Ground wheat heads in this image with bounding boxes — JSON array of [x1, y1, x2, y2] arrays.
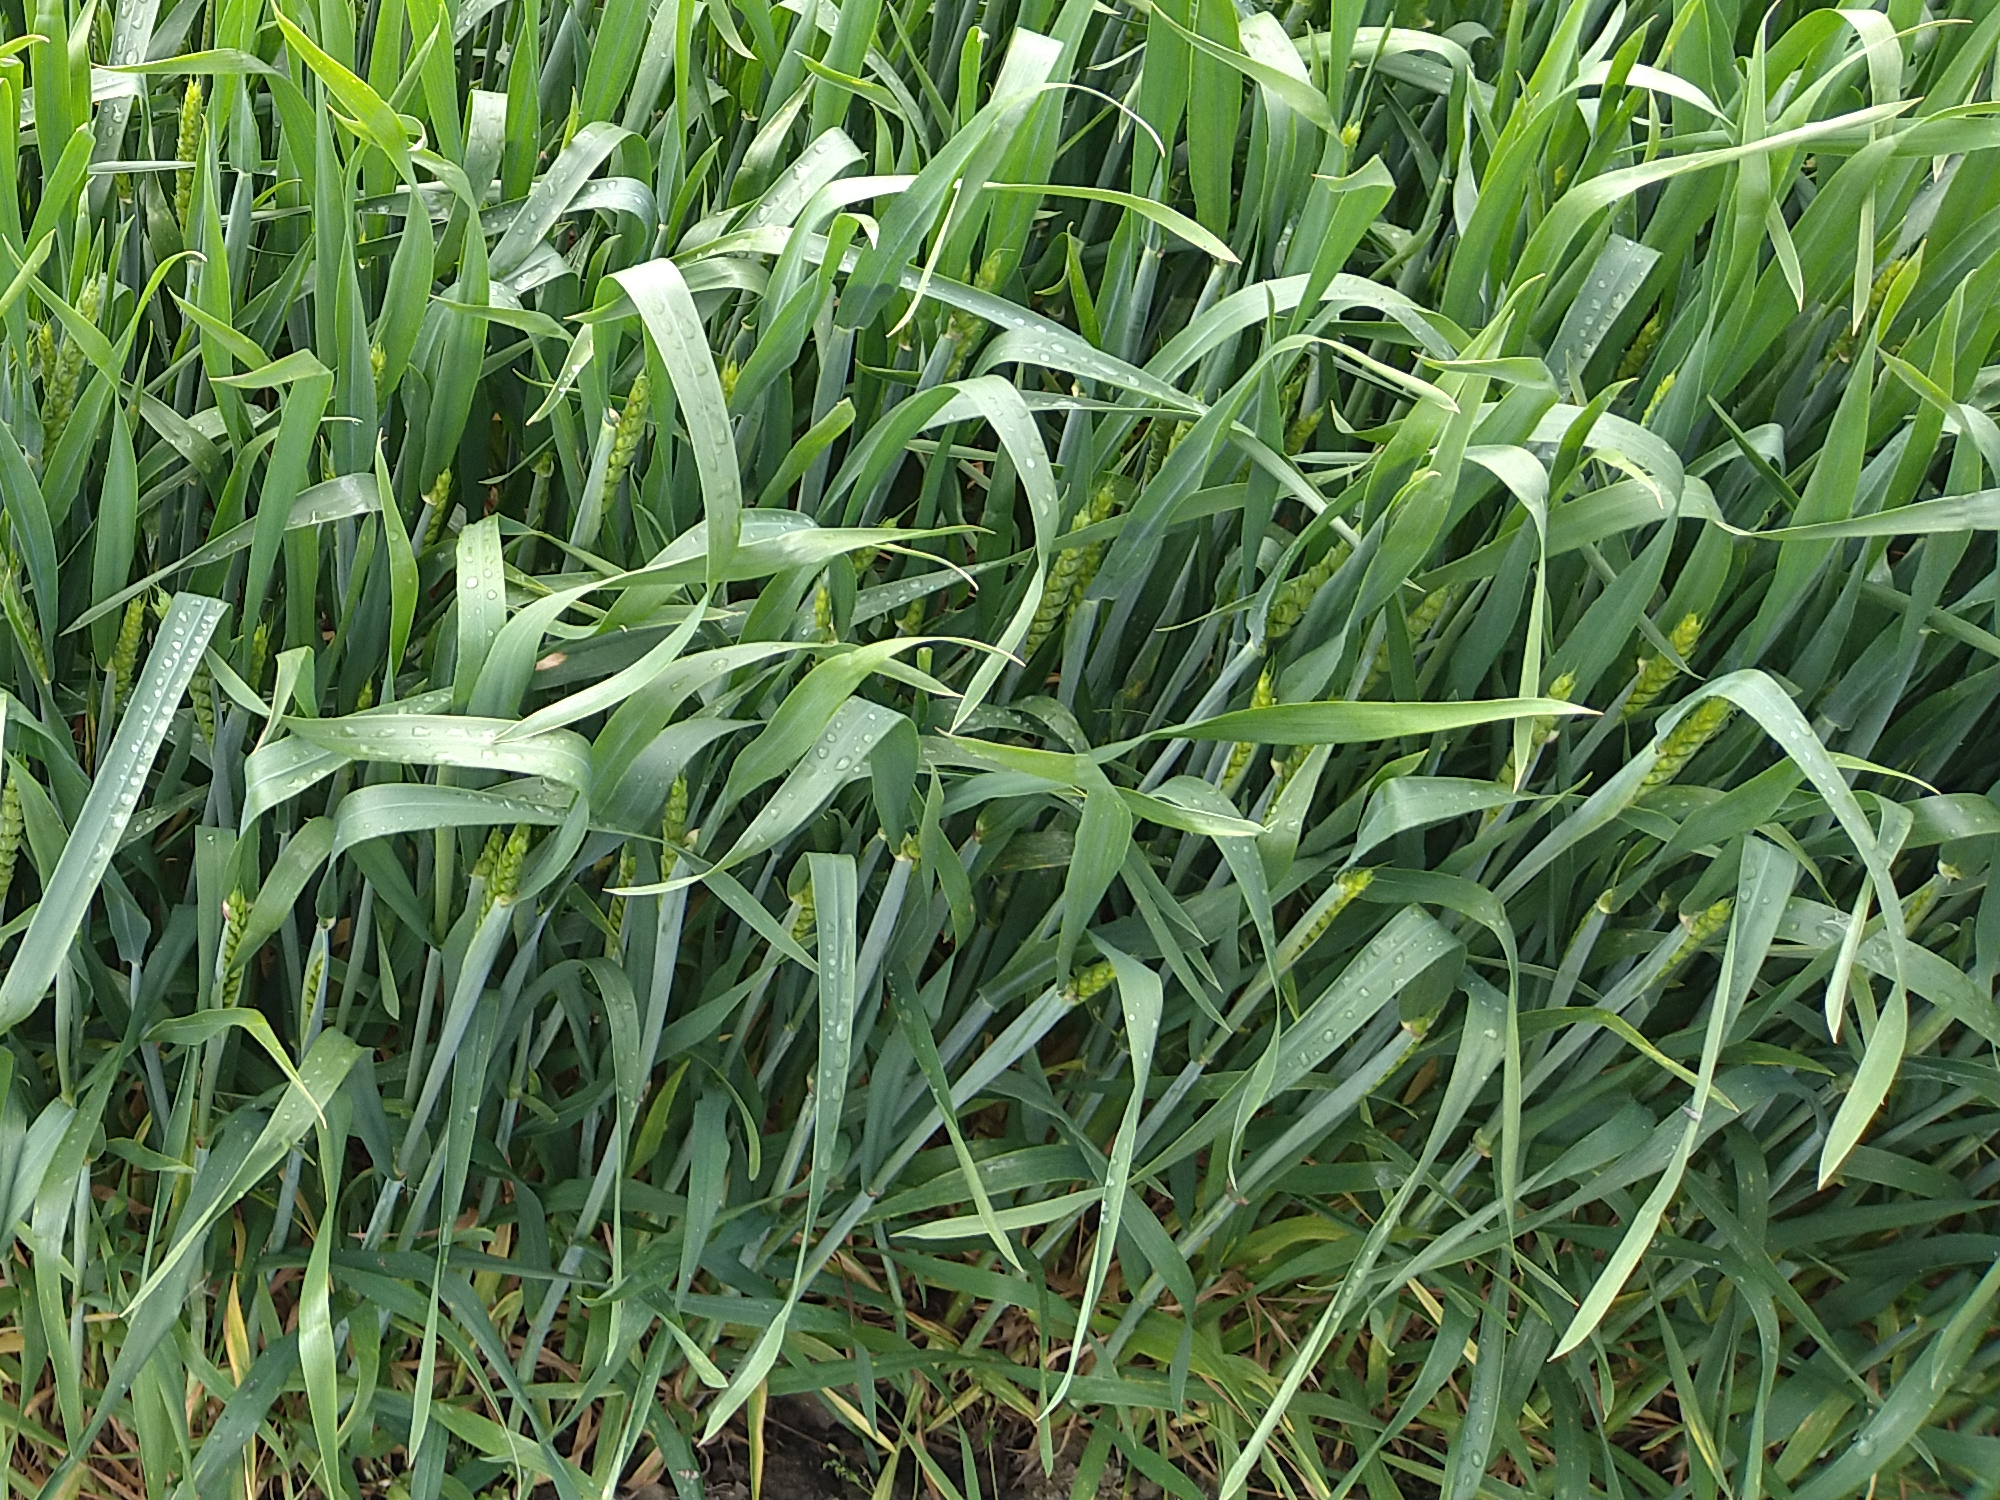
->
[[1291, 868, 1374, 960], [346, 680, 375, 766], [782, 882, 826, 955], [1253, 522, 1361, 638], [1065, 957, 1113, 999], [1289, 407, 1326, 454], [1343, 124, 1361, 170], [1562, 896, 1603, 964], [203, 0, 213, 48], [1412, 0, 1437, 30], [244, 627, 266, 698], [1086, 486, 1113, 566], [0, 520, 56, 676], [1638, 895, 1734, 990], [947, 257, 1000, 377], [891, 830, 925, 860], [1358, 575, 1452, 693], [213, 895, 254, 1009], [176, 72, 206, 201], [0, 765, 28, 906], [1502, 0, 1517, 30], [597, 369, 655, 515], [1273, 743, 1313, 803], [1217, 670, 1274, 796], [1363, 1014, 1434, 1093], [188, 654, 219, 742], [366, 350, 387, 383], [602, 843, 636, 964], [90, 20, 98, 64], [806, 514, 896, 644], [1870, 257, 1905, 326], [1614, 312, 1660, 407], [1276, 378, 1302, 427], [409, 469, 451, 557], [114, 602, 145, 699], [298, 958, 324, 1039], [1549, 169, 1565, 204], [1620, 615, 1704, 720], [1218, 548, 1244, 622], [36, 280, 107, 465], [661, 783, 688, 873], [472, 826, 499, 901], [1856, 878, 1947, 972], [1021, 504, 1091, 659], [719, 362, 741, 395], [1826, 1064, 1865, 1092], [1478, 673, 1578, 840], [1641, 373, 1676, 431], [38, 327, 53, 384], [1628, 697, 1731, 805], [1150, 409, 1176, 468], [479, 822, 531, 933], [898, 594, 926, 633], [1165, 421, 1195, 464]]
